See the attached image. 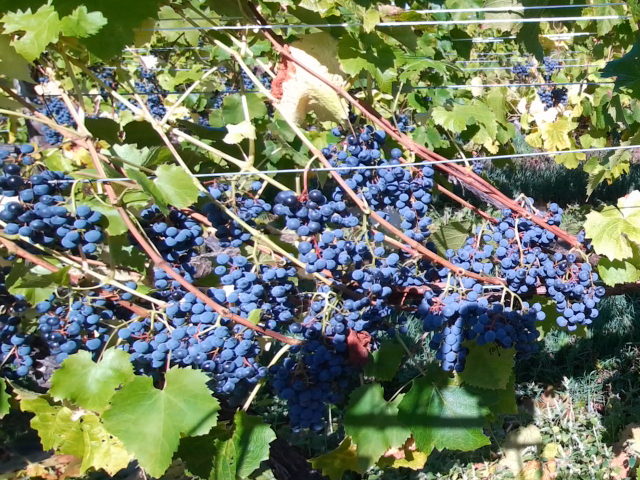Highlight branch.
<instances>
[{
    "instance_id": "3",
    "label": "branch",
    "mask_w": 640,
    "mask_h": 480,
    "mask_svg": "<svg viewBox=\"0 0 640 480\" xmlns=\"http://www.w3.org/2000/svg\"><path fill=\"white\" fill-rule=\"evenodd\" d=\"M102 184L105 186V189L108 192V195L112 200V203L115 205L118 212L126 221V224L128 225L135 239L144 246V248L146 249L150 257L153 260H155L157 263H159L167 271V273L171 276V278L174 281L179 283L181 286H183L187 290L192 291L194 294H197L213 309L217 311L222 310L224 315L234 319L237 322L243 323L246 326H249L252 329H256L257 331H260L261 333L266 334L267 336H270L272 338H277L279 340L286 341L294 346H299L301 344V341L299 339H296L291 335L284 334L279 331H274L269 327H265L264 325L258 322H254L253 320L248 319L247 317L242 316L240 314H237L236 312L230 310L229 308H226L225 306H222L221 304L214 301L202 289L194 285L192 282H188L183 277L179 276L177 272L172 268V266L168 264L159 254H157L156 251L151 246V244L140 234V232L138 231V228L133 222V219L130 217V215L128 214V212L125 210L124 206L120 202L119 198L117 197L112 184L110 182L102 183Z\"/></svg>"
},
{
    "instance_id": "2",
    "label": "branch",
    "mask_w": 640,
    "mask_h": 480,
    "mask_svg": "<svg viewBox=\"0 0 640 480\" xmlns=\"http://www.w3.org/2000/svg\"><path fill=\"white\" fill-rule=\"evenodd\" d=\"M136 102L138 103V106L140 107L142 113L144 114V116L150 121L151 125H152V129L154 131H156L158 133V135L160 136V138L162 139V141L164 142L165 146L167 147L169 153L175 158V160L177 161V164L179 165V167L181 168V170L185 173V175L190 179V181L193 183V185L196 188H200V190L205 193L208 197H210L215 203H217L221 208L224 209V211L227 213V215L236 223L240 224L242 227H245L246 229H248V231L250 232V234L255 237L256 234L260 235V241L262 244L266 245L268 248H271L277 252H280L282 254H285L286 256H288V258L297 266L299 267L303 272H305L308 275L311 276H315L316 278H319L320 280H322L325 284L327 285H331L337 289H339L341 292L347 294L350 298H353L356 301H359L361 299V296L356 293L355 291H352L349 287L343 285L341 282L337 281L336 279L333 278H329L328 276H326L324 273H322L321 271H318L316 273H309L305 270V263L301 260H299V258L287 247H284L282 245H279L273 241H270L268 238H266L265 236L261 235L255 228V226L245 220L242 219L238 214H236L233 209L218 195H216L210 188H208L203 181L200 178H197L194 176V173L189 169V167L186 165L184 159L182 158V156L179 154V152L176 150V148L174 147L172 141L169 139L168 135L166 134V132L164 131V129L162 128V126L158 123V120L155 116H153L150 112V110L148 109L144 99L140 96L137 95L135 97Z\"/></svg>"
},
{
    "instance_id": "1",
    "label": "branch",
    "mask_w": 640,
    "mask_h": 480,
    "mask_svg": "<svg viewBox=\"0 0 640 480\" xmlns=\"http://www.w3.org/2000/svg\"><path fill=\"white\" fill-rule=\"evenodd\" d=\"M201 33L205 37H207L209 40H211L213 43L218 45L219 47L223 48L227 52L232 53V55L235 57V59L237 61V64H238L239 68L243 72H245V74L251 80L253 85L256 87V90L258 92H260L261 95L270 103V105L281 116V118L288 123L290 129L294 132V134L296 136H298L303 142H305V144L311 150V152L313 154L314 153L318 154V159L322 162V164L325 167L328 168V170H330V175L335 179V181L339 185L340 189L348 197V199L352 203L357 205L361 210H364V209L368 210V214L371 216L372 221L374 223H377L380 226H382L383 228L387 229L389 232H391L393 235H395L398 239H400L404 243L419 249L425 255L430 257L434 262H436L438 265H441V266L446 267V268H448L450 270L456 271V272H458V273H460L462 275H465V276H468V277H471V278H475V279H478V280L491 282V283L497 284L498 286H501L500 283H499V277H496V276H493V275H489V274H485V273H480V272H477V271H473V270L464 268V267H462V266H460L458 264L452 263V262H450L448 260H445L443 258H440L438 255H436L427 246H425L424 244H422L421 242H419L417 240H414V239L406 236L405 234L400 232L395 226H393L391 223L385 221L380 216H378V214L376 213V211L374 209L369 207L367 204L363 203L357 196H355L352 193V191L348 188V186L346 185V183L344 182L342 177L338 174L337 171L334 170L333 165L331 164L329 159L325 156V154L317 148V146L314 144V142L301 129H299V127L296 125L294 119L291 116H289L281 108V106L274 99V97L271 94H269L268 91L263 87V85L260 83L258 78L253 73V71L244 62V59H243L242 55L239 53V51L234 46L230 45L229 43H226L221 38H219L218 36L213 34L210 30L209 31H201Z\"/></svg>"
},
{
    "instance_id": "4",
    "label": "branch",
    "mask_w": 640,
    "mask_h": 480,
    "mask_svg": "<svg viewBox=\"0 0 640 480\" xmlns=\"http://www.w3.org/2000/svg\"><path fill=\"white\" fill-rule=\"evenodd\" d=\"M261 33L273 46H275L279 51L284 53L294 66H296L297 68H300L302 71H304L311 77L321 81L322 83L332 88L343 100H345L349 104L356 107L367 118L371 119L374 123L382 127L389 134H391L392 136L397 138L399 141L405 143L408 147L413 149L416 153H418L422 157L424 161L426 162L432 161L431 157L435 159L446 158V155L443 152H437L432 148L425 146L423 144H416L415 142L410 140L407 136L403 135L400 131H397L394 127H392L386 121L380 119L375 113L369 111L360 101H358L357 99L347 94L332 79H329L325 75L312 69L310 66H307L304 62L299 61L298 58L291 52V50L288 47L283 45L284 40L272 28H262Z\"/></svg>"
},
{
    "instance_id": "10",
    "label": "branch",
    "mask_w": 640,
    "mask_h": 480,
    "mask_svg": "<svg viewBox=\"0 0 640 480\" xmlns=\"http://www.w3.org/2000/svg\"><path fill=\"white\" fill-rule=\"evenodd\" d=\"M248 7L253 13L254 17L259 21V23H267V20L263 17L261 12L258 10L253 0H250L248 2Z\"/></svg>"
},
{
    "instance_id": "8",
    "label": "branch",
    "mask_w": 640,
    "mask_h": 480,
    "mask_svg": "<svg viewBox=\"0 0 640 480\" xmlns=\"http://www.w3.org/2000/svg\"><path fill=\"white\" fill-rule=\"evenodd\" d=\"M0 242L9 252H12V253H14V254L22 257V258L27 259L28 261H30L33 264H35L41 270L48 271V272L52 273L55 276H58L60 274V271L55 266H52V265L47 264V263H43L37 257L32 255L30 252L24 251V250L14 246V245H12L3 234H0Z\"/></svg>"
},
{
    "instance_id": "7",
    "label": "branch",
    "mask_w": 640,
    "mask_h": 480,
    "mask_svg": "<svg viewBox=\"0 0 640 480\" xmlns=\"http://www.w3.org/2000/svg\"><path fill=\"white\" fill-rule=\"evenodd\" d=\"M77 282L80 285L83 286H88L94 290H97L98 292L104 294L107 298H109L111 301L115 302L116 304H118L121 307H124L126 309L129 310H134L137 311L138 313L142 314V315H146L148 313V310L142 306H140L139 304L136 303H131L128 302L126 300L121 299L120 297H118L117 295H115L113 292H111L108 288L102 286L101 284L94 282L90 279H85L82 277H79L77 279Z\"/></svg>"
},
{
    "instance_id": "9",
    "label": "branch",
    "mask_w": 640,
    "mask_h": 480,
    "mask_svg": "<svg viewBox=\"0 0 640 480\" xmlns=\"http://www.w3.org/2000/svg\"><path fill=\"white\" fill-rule=\"evenodd\" d=\"M434 189L438 192L443 193L446 196H449L453 199L458 200L467 210L473 212L474 214L479 215L481 218H483L486 222L493 224L495 222V219L488 215L485 211H483L481 208L476 207L475 205L471 204L461 193L459 192H455L451 189L446 188L445 186L441 185V184H436L434 186Z\"/></svg>"
},
{
    "instance_id": "5",
    "label": "branch",
    "mask_w": 640,
    "mask_h": 480,
    "mask_svg": "<svg viewBox=\"0 0 640 480\" xmlns=\"http://www.w3.org/2000/svg\"><path fill=\"white\" fill-rule=\"evenodd\" d=\"M448 167L443 164H437L435 167L446 175L465 181L474 189L484 192L493 201L502 205L505 209H509L512 212H517L519 209L523 210V215L536 223L540 228L545 230L548 234L554 235L561 240L574 244L576 248L581 246V242L574 236H570L562 231L550 227L547 223L541 220L539 216L529 212L526 208L521 207L518 203L512 201L509 197L505 196L502 192L493 187V185L487 182L483 177L479 176L474 170L458 164L448 163Z\"/></svg>"
},
{
    "instance_id": "6",
    "label": "branch",
    "mask_w": 640,
    "mask_h": 480,
    "mask_svg": "<svg viewBox=\"0 0 640 480\" xmlns=\"http://www.w3.org/2000/svg\"><path fill=\"white\" fill-rule=\"evenodd\" d=\"M61 93L68 110L70 111L74 121L76 122L77 128L80 131L82 138L85 140V144L88 148V151L92 160V164L95 166V169L99 174V178H106V172L102 167L101 162L99 161V157L96 152L95 146L92 142V138L89 136V133L84 126L83 120L81 119L77 109L73 104V101L69 95V91L66 88H63L61 90Z\"/></svg>"
}]
</instances>
